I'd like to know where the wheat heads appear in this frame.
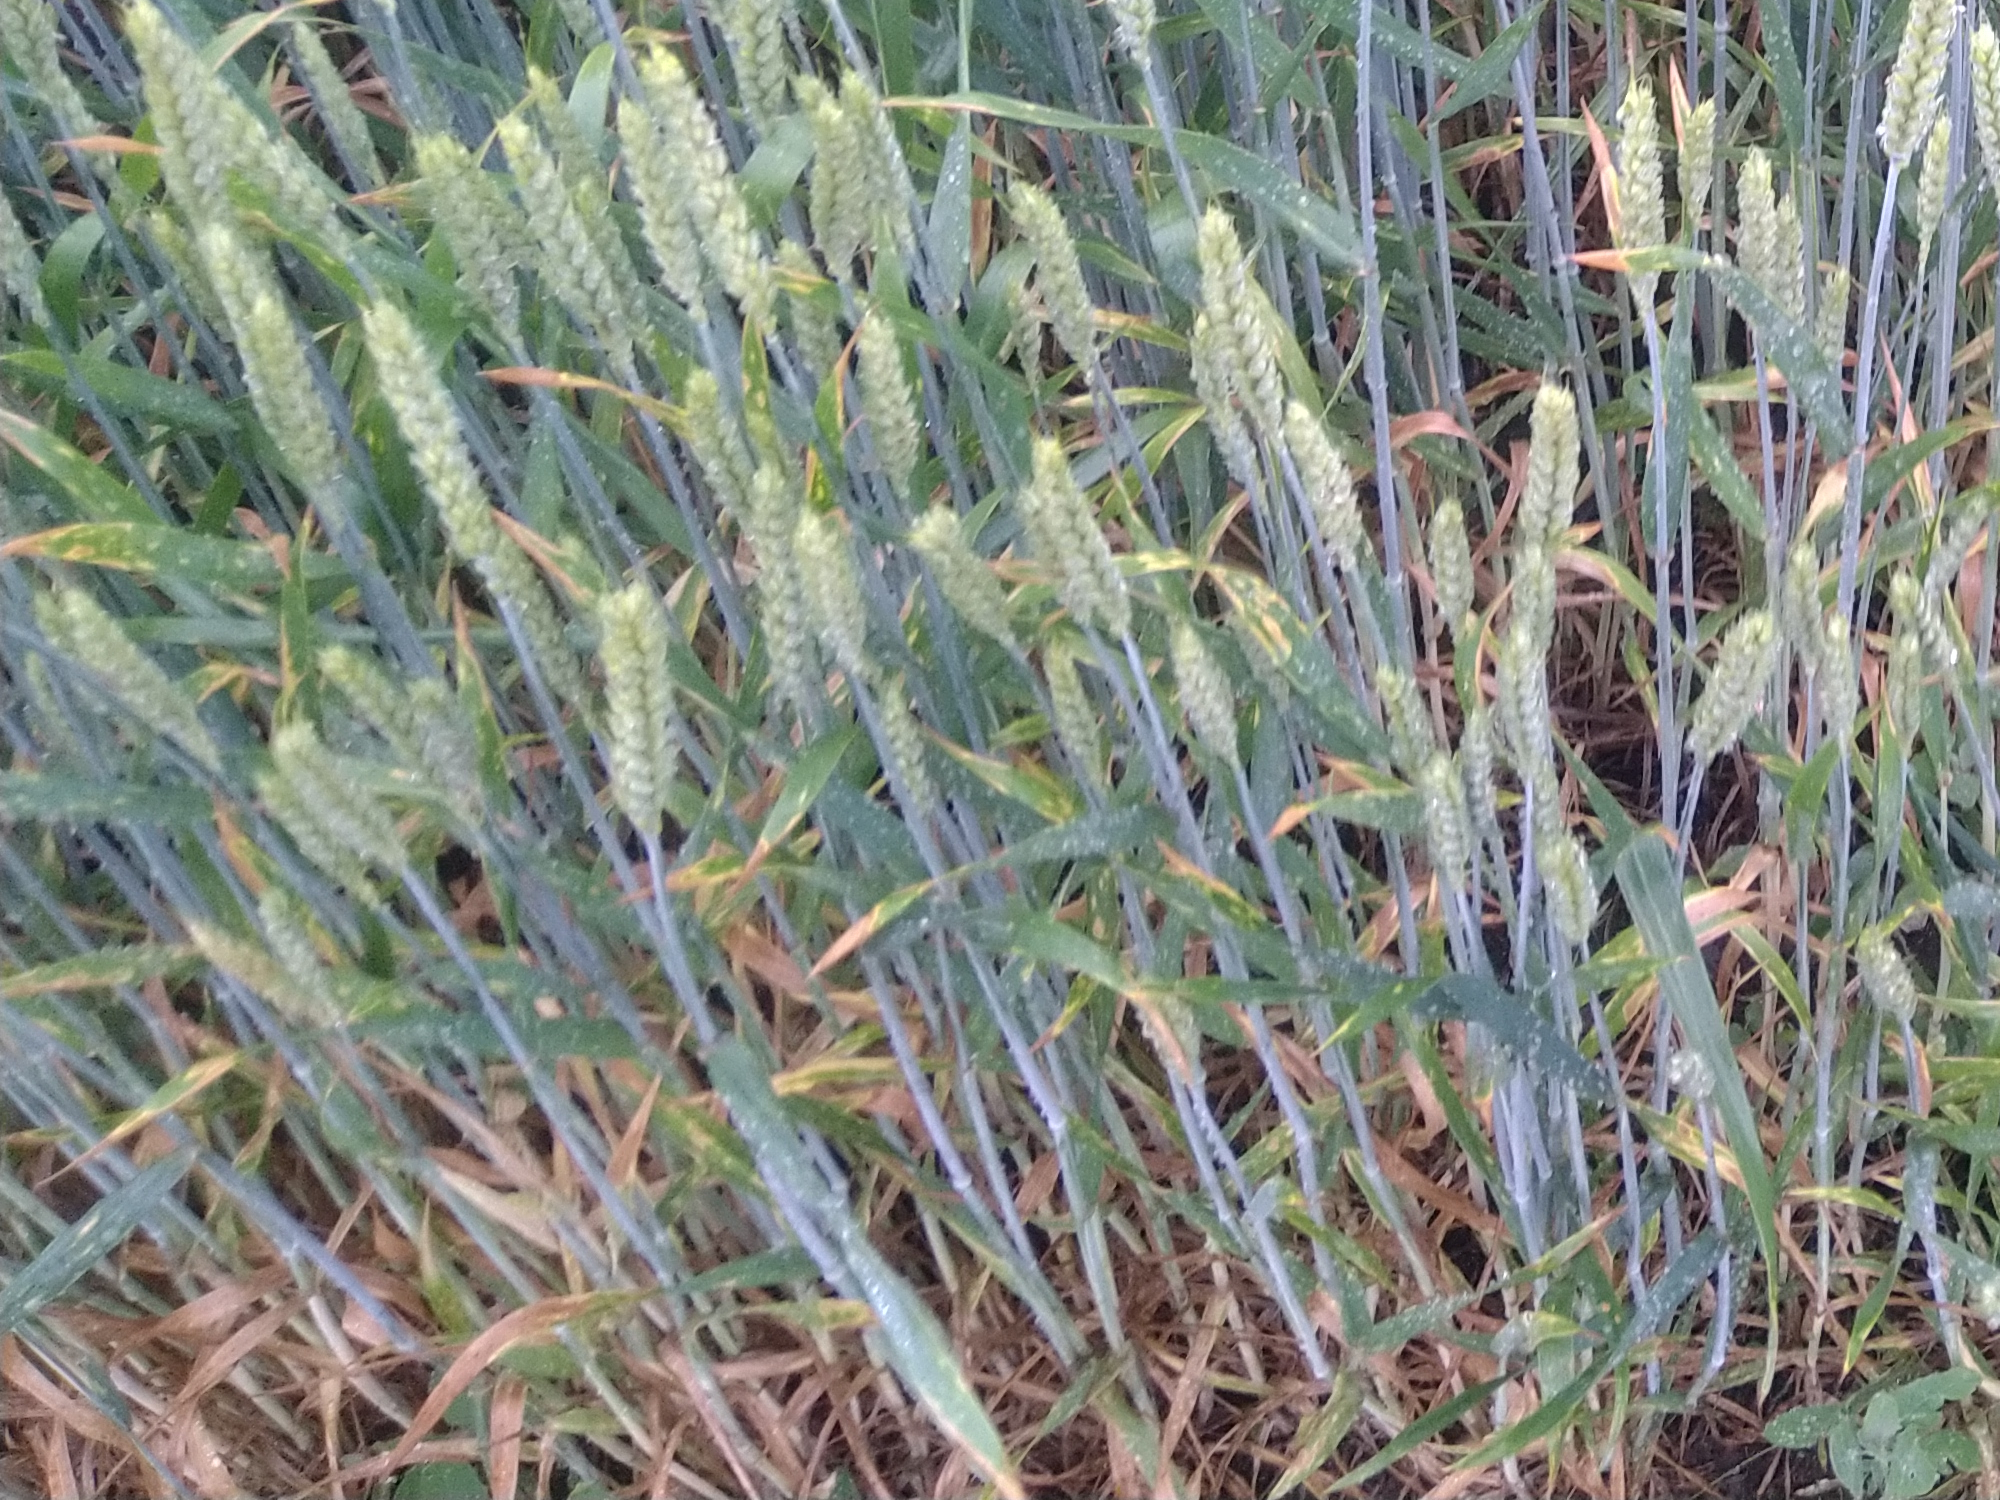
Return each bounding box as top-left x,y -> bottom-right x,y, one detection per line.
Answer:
1972,26 -> 2000,204
1432,496 -> 1473,627
57,78 -> 118,170
651,49 -> 776,326
1787,546 -> 1829,667
800,526 -> 865,641
873,693 -> 932,811
816,102 -> 853,259
1035,442 -> 1124,617
742,470 -> 821,713
1382,666 -> 1432,777
1690,615 -> 1785,756
1809,273 -> 1851,389
845,75 -> 920,240
1931,496 -> 1985,593
1045,643 -> 1097,764
1742,146 -> 1773,317
501,122 -> 624,336
502,534 -> 595,690
675,370 -> 751,519
784,245 -> 845,383
471,162 -> 541,265
1190,315 -> 1252,477
795,78 -> 837,118
1011,496 -> 1092,611
1175,627 -> 1226,748
1087,0 -> 1155,52
611,97 -> 707,301
121,2 -> 336,249
912,507 -> 1016,635
413,675 -> 484,805
1829,620 -> 1858,730
1286,404 -> 1359,547
70,591 -> 203,756
1857,925 -> 1900,1017
258,766 -> 381,917
1887,575 -> 1952,667
1679,100 -> 1719,212
1421,753 -> 1466,865
1453,709 -> 1490,834
1012,178 -> 1094,339
1517,385 -> 1582,547
0,0 -> 57,86
274,718 -> 405,867
527,68 -> 655,362
138,50 -> 205,227
1002,281 -> 1041,373
420,142 -> 514,348
1917,121 -> 1955,228
365,309 -> 522,596
1892,632 -> 1917,740
1510,659 -> 1562,845
1197,200 -> 1289,427
1876,0 -> 1965,154
284,8 -> 379,189
327,649 -> 442,764
1515,562 -> 1554,658
1767,203 -> 1807,351
853,305 -> 920,469
0,191 -> 50,324
130,206 -> 234,336
1542,823 -> 1595,939
1620,89 -> 1657,302
735,0 -> 779,137
205,226 -> 356,519
606,588 -> 669,829
521,0 -> 601,49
